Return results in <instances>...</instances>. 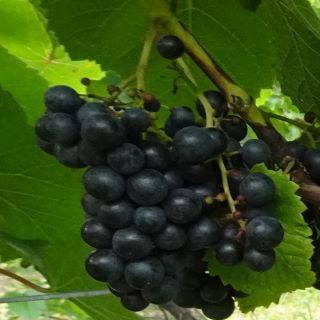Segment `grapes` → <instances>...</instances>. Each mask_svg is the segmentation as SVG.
<instances>
[{"instance_id": "grapes-1", "label": "grapes", "mask_w": 320, "mask_h": 320, "mask_svg": "<svg viewBox=\"0 0 320 320\" xmlns=\"http://www.w3.org/2000/svg\"><path fill=\"white\" fill-rule=\"evenodd\" d=\"M201 93L213 117L223 116L226 137L196 125L190 108H171L160 130L174 142L164 145L154 132L143 141L153 123L144 112L112 118L107 104L86 102L66 85L44 94L48 115L35 123L39 147L67 168L91 166L82 178L81 237L95 247L86 271L130 311L173 301L225 320L234 312L232 297L249 294L224 287L202 258L266 272L284 238L273 215L280 202L273 179L249 173L262 163L273 171L269 146L253 138L241 147L245 120L227 116L220 91Z\"/></svg>"}, {"instance_id": "grapes-2", "label": "grapes", "mask_w": 320, "mask_h": 320, "mask_svg": "<svg viewBox=\"0 0 320 320\" xmlns=\"http://www.w3.org/2000/svg\"><path fill=\"white\" fill-rule=\"evenodd\" d=\"M291 156L299 161L309 171L310 178L320 186V149L309 150L303 142L295 141L288 144Z\"/></svg>"}, {"instance_id": "grapes-3", "label": "grapes", "mask_w": 320, "mask_h": 320, "mask_svg": "<svg viewBox=\"0 0 320 320\" xmlns=\"http://www.w3.org/2000/svg\"><path fill=\"white\" fill-rule=\"evenodd\" d=\"M156 50L161 57L174 60L184 54L185 46L177 36L166 35L157 42Z\"/></svg>"}, {"instance_id": "grapes-4", "label": "grapes", "mask_w": 320, "mask_h": 320, "mask_svg": "<svg viewBox=\"0 0 320 320\" xmlns=\"http://www.w3.org/2000/svg\"><path fill=\"white\" fill-rule=\"evenodd\" d=\"M196 108H197L199 114L201 115V117H203L204 119L207 120L206 110L198 97L196 100Z\"/></svg>"}, {"instance_id": "grapes-5", "label": "grapes", "mask_w": 320, "mask_h": 320, "mask_svg": "<svg viewBox=\"0 0 320 320\" xmlns=\"http://www.w3.org/2000/svg\"><path fill=\"white\" fill-rule=\"evenodd\" d=\"M317 117V114L314 113V112H307L305 113L304 115V119L306 122L308 123H312L313 122V119H315Z\"/></svg>"}]
</instances>
